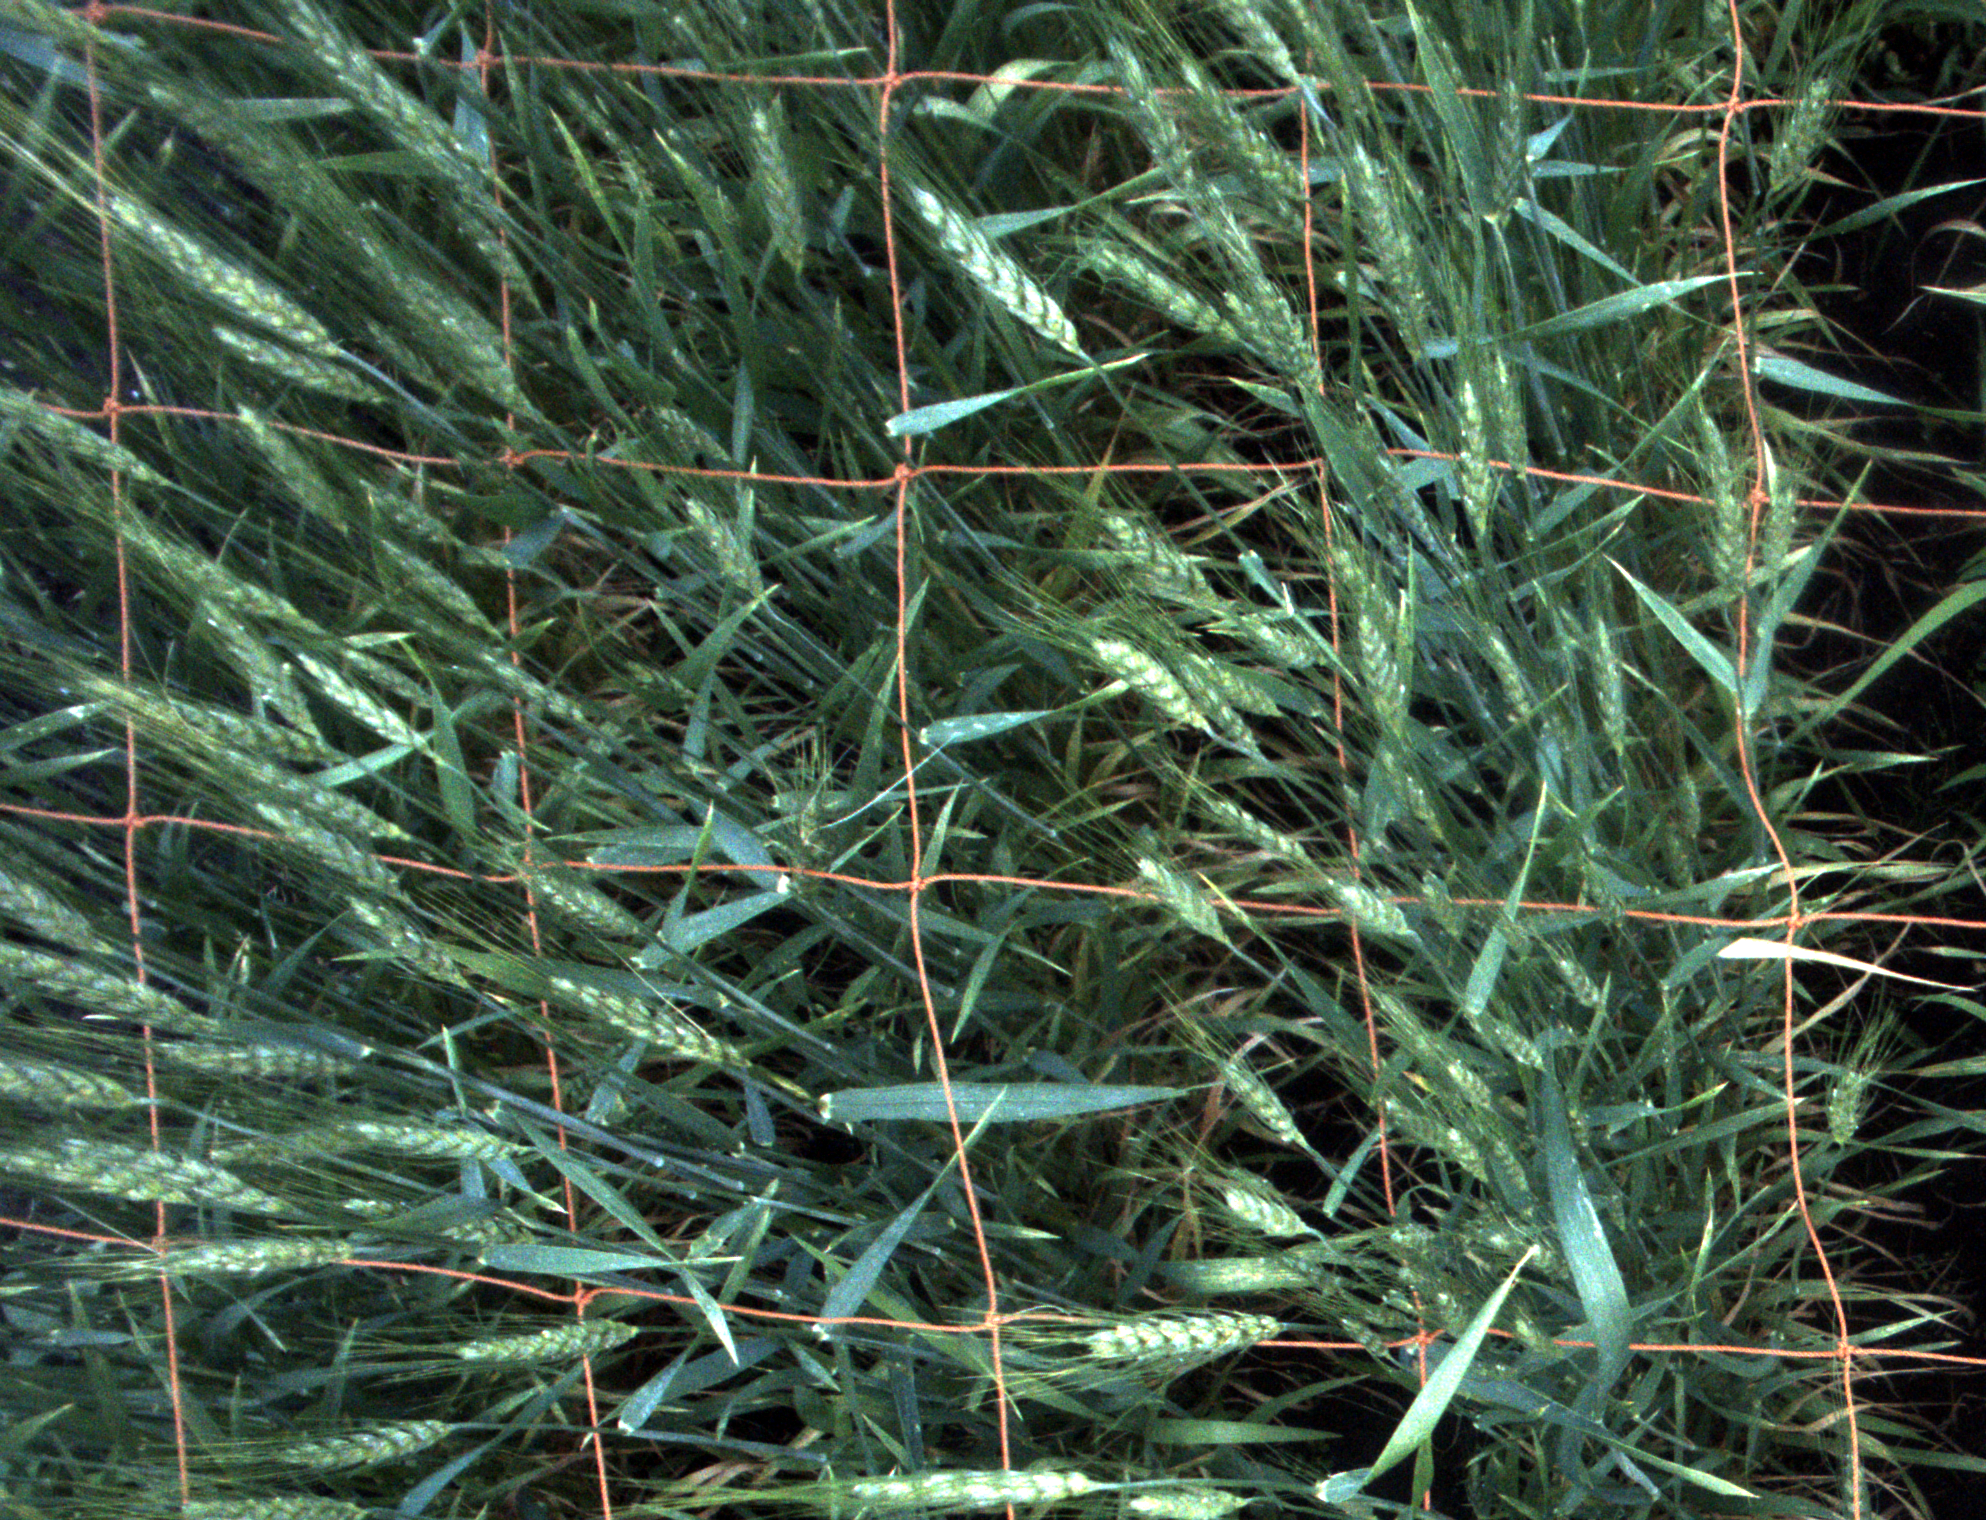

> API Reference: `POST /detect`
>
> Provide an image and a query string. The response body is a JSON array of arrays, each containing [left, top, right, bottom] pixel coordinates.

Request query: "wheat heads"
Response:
[[136, 1235, 355, 1279], [651, 407, 735, 473], [1348, 138, 1435, 359], [1821, 1063, 1867, 1145], [1678, 772, 1702, 831], [198, 599, 319, 738], [786, 782, 830, 906], [277, 3, 485, 184], [1578, 855, 1627, 937], [1176, 56, 1311, 202], [1338, 1321, 1386, 1363], [1375, 451, 1443, 560], [149, 1043, 357, 1087], [826, 371, 867, 423], [1395, 1262, 1443, 1292], [1216, 1048, 1304, 1143], [1439, 1127, 1486, 1184], [299, 650, 430, 756], [255, 798, 404, 899], [1556, 953, 1602, 1017], [342, 1196, 412, 1218], [63, 1136, 304, 1226], [348, 1114, 534, 1158], [1123, 1487, 1249, 1520], [1492, 80, 1523, 211], [273, 1416, 447, 1474], [238, 405, 362, 524], [180, 1491, 375, 1520], [1587, 617, 1629, 763], [377, 533, 490, 635], [1216, 1189, 1311, 1237], [436, 1211, 527, 1248], [0, 869, 116, 959], [849, 1465, 1103, 1513], [1835, 1447, 1876, 1520], [404, 270, 527, 358], [1221, 1, 1300, 80], [1137, 853, 1229, 944], [1455, 378, 1494, 544], [561, 1044, 626, 1106], [205, 323, 366, 403], [1329, 877, 1417, 941], [1762, 487, 1797, 584], [352, 888, 470, 994], [1358, 612, 1408, 732], [790, 0, 833, 23], [1106, 34, 1198, 186], [1488, 347, 1530, 478], [129, 688, 295, 758], [1099, 509, 1223, 613], [4, 1149, 202, 1215], [1402, 776, 1443, 831], [1225, 292, 1276, 355], [1441, 1288, 1474, 1341], [531, 867, 655, 944], [342, 648, 434, 712], [1313, 1471, 1390, 1520], [1295, 5, 1342, 72], [1205, 802, 1320, 871], [1483, 630, 1534, 718], [1327, 548, 1400, 624], [1088, 242, 1243, 341], [1494, 1136, 1538, 1213], [1510, 1313, 1567, 1366], [690, 160, 746, 235], [1199, 654, 1278, 714], [1485, 1235, 1556, 1273], [1450, 1058, 1496, 1112], [0, 1048, 141, 1114], [1492, 1023, 1541, 1069], [1209, 222, 1318, 368], [359, 478, 472, 562], [357, 233, 531, 412], [1697, 401, 1737, 464], [1238, 613, 1322, 666], [1, 387, 172, 493], [0, 941, 225, 1043], [1366, 1306, 1415, 1335], [1658, 835, 1693, 888], [1254, 177, 1313, 241], [1421, 871, 1464, 937], [1766, 74, 1834, 197], [1187, 676, 1260, 758], [679, 496, 766, 599], [192, 740, 414, 844], [0, 3, 103, 49], [1189, 1257, 1315, 1292], [1375, 990, 1439, 1063], [1220, 1164, 1289, 1206], [545, 973, 755, 1078], [567, 92, 657, 206], [364, 321, 452, 403], [1092, 639, 1207, 738], [1386, 1218, 1454, 1259], [624, 652, 697, 703], [1086, 1315, 1291, 1377], [754, 102, 814, 275], [907, 175, 1088, 354], [112, 193, 342, 359], [121, 515, 317, 635], [1386, 1100, 1443, 1151], [476, 644, 589, 729], [1493, 911, 1531, 955], [207, 1114, 353, 1169], [149, 78, 350, 222], [450, 191, 538, 303], [452, 1315, 644, 1366], [1708, 469, 1751, 584]]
